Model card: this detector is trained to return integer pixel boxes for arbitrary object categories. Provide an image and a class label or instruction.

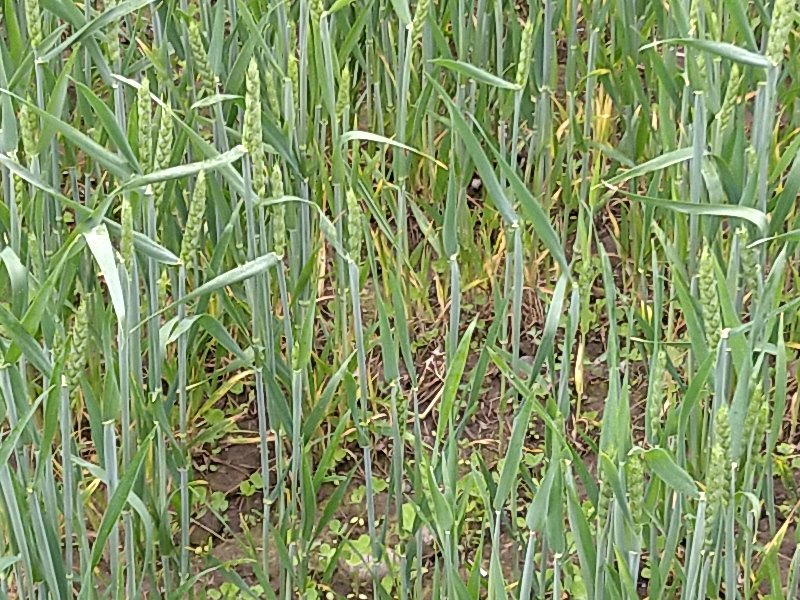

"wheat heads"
[773,0,800,61]
[418,463,440,529]
[26,94,37,130]
[52,316,67,370]
[714,406,733,513]
[597,446,616,527]
[120,203,133,269]
[96,0,118,57]
[696,53,707,85]
[705,443,724,534]
[627,454,644,526]
[719,65,739,130]
[23,0,43,50]
[28,230,42,281]
[151,100,173,193]
[298,0,325,25]
[738,229,760,298]
[287,55,300,108]
[347,190,361,266]
[70,298,91,381]
[157,269,166,307]
[270,164,287,255]
[181,174,203,266]
[649,349,666,432]
[336,63,351,116]
[11,169,23,213]
[136,75,152,173]
[410,0,431,46]
[20,108,32,155]
[253,101,264,189]
[242,55,259,151]
[265,69,279,116]
[768,0,785,55]
[515,20,530,86]
[186,19,216,100]
[689,0,709,29]
[699,245,722,364]
[291,342,299,375]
